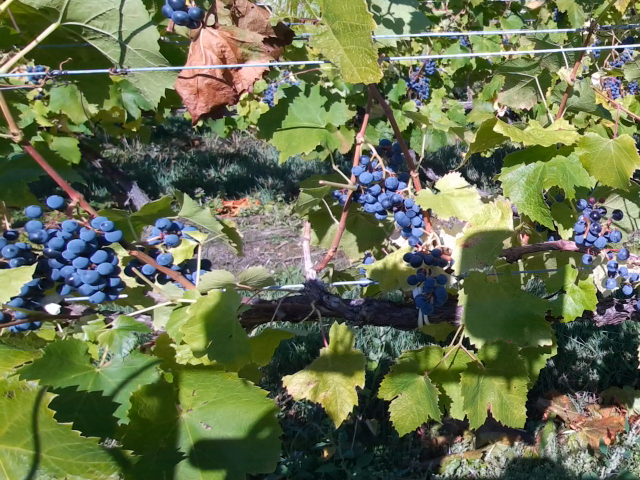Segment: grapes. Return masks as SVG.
Segmentation results:
<instances>
[{"label":"grapes","mask_w":640,"mask_h":480,"mask_svg":"<svg viewBox=\"0 0 640 480\" xmlns=\"http://www.w3.org/2000/svg\"><path fill=\"white\" fill-rule=\"evenodd\" d=\"M149 256L158 260L165 267L181 272L183 274V277L196 284L198 259L184 260L180 262L179 267L178 265L172 264L174 262L173 254L171 252H161V248H150Z\"/></svg>","instance_id":"obj_9"},{"label":"grapes","mask_w":640,"mask_h":480,"mask_svg":"<svg viewBox=\"0 0 640 480\" xmlns=\"http://www.w3.org/2000/svg\"><path fill=\"white\" fill-rule=\"evenodd\" d=\"M162 7L163 16L171 19L177 25L188 28H198L203 19V9L201 7H187L185 0H164Z\"/></svg>","instance_id":"obj_6"},{"label":"grapes","mask_w":640,"mask_h":480,"mask_svg":"<svg viewBox=\"0 0 640 480\" xmlns=\"http://www.w3.org/2000/svg\"><path fill=\"white\" fill-rule=\"evenodd\" d=\"M19 238L17 230H6L0 237V255L7 259L10 267L32 265L36 262V254L29 243L8 244V241H16Z\"/></svg>","instance_id":"obj_5"},{"label":"grapes","mask_w":640,"mask_h":480,"mask_svg":"<svg viewBox=\"0 0 640 480\" xmlns=\"http://www.w3.org/2000/svg\"><path fill=\"white\" fill-rule=\"evenodd\" d=\"M41 326H42L41 320H30L29 322L19 323L18 325H10L7 327V330L12 331L13 333H19L20 331L38 329Z\"/></svg>","instance_id":"obj_11"},{"label":"grapes","mask_w":640,"mask_h":480,"mask_svg":"<svg viewBox=\"0 0 640 480\" xmlns=\"http://www.w3.org/2000/svg\"><path fill=\"white\" fill-rule=\"evenodd\" d=\"M351 174L358 178L360 185H369L371 182H381L384 179V171L378 166L376 160H371L367 155L360 157L358 166L351 168ZM385 188L381 184L369 185L366 192H356L353 195L355 204H364L366 213H375V218L379 221L387 219L388 209L393 212V219L401 228L404 238H408L410 246H418L423 243L425 227L421 206L416 204L412 197L405 198L397 191L404 190L406 183L400 181L397 176H387L385 178Z\"/></svg>","instance_id":"obj_2"},{"label":"grapes","mask_w":640,"mask_h":480,"mask_svg":"<svg viewBox=\"0 0 640 480\" xmlns=\"http://www.w3.org/2000/svg\"><path fill=\"white\" fill-rule=\"evenodd\" d=\"M168 231H198V228L196 226L184 225L183 222H180L179 220L171 221L167 218H157L155 220V226L151 230L150 238H158L162 233H166ZM180 237L190 241H195V238L186 232L166 233L162 238V245L164 247L178 246L180 244Z\"/></svg>","instance_id":"obj_7"},{"label":"grapes","mask_w":640,"mask_h":480,"mask_svg":"<svg viewBox=\"0 0 640 480\" xmlns=\"http://www.w3.org/2000/svg\"><path fill=\"white\" fill-rule=\"evenodd\" d=\"M90 227H80V222L67 219L60 228L47 227L42 220H29L25 230L29 240L41 244L44 258L39 260V271L46 277H36L25 282L18 297L7 302L8 307L24 305V296L30 287L51 291L57 286L59 295L78 293L89 297L91 304L116 302L125 289L119 277L120 267L116 254L109 248L123 238V231L104 215L90 218Z\"/></svg>","instance_id":"obj_1"},{"label":"grapes","mask_w":640,"mask_h":480,"mask_svg":"<svg viewBox=\"0 0 640 480\" xmlns=\"http://www.w3.org/2000/svg\"><path fill=\"white\" fill-rule=\"evenodd\" d=\"M590 203L585 198H580L577 201V207L583 210V214L577 217V221L574 223V241L579 246L592 247L593 245L597 249H604L608 242L618 244L622 238L623 233L620 230L608 231L605 235L598 234L603 230V225L599 220L607 214V209L604 206H593L596 202L594 197L589 198Z\"/></svg>","instance_id":"obj_4"},{"label":"grapes","mask_w":640,"mask_h":480,"mask_svg":"<svg viewBox=\"0 0 640 480\" xmlns=\"http://www.w3.org/2000/svg\"><path fill=\"white\" fill-rule=\"evenodd\" d=\"M132 268L136 269L137 271H140V273L142 275H145V277L148 278L150 282H153V283L157 282L158 284L166 285L170 281L171 283L175 284L179 289L185 290V286L181 285L179 282H176L169 275L163 274L159 270H156V268L151 264L144 265L142 261L138 259H132L128 261L127 267L124 268V274L126 276L136 277L135 282L138 283L139 285H147V281L143 280L141 277H137V274H135Z\"/></svg>","instance_id":"obj_8"},{"label":"grapes","mask_w":640,"mask_h":480,"mask_svg":"<svg viewBox=\"0 0 640 480\" xmlns=\"http://www.w3.org/2000/svg\"><path fill=\"white\" fill-rule=\"evenodd\" d=\"M403 260L409 263L412 268H418L415 275H409L406 278V284L408 286H417L421 282L424 284V286H418L412 291L414 305L421 310V313L430 315L434 311V307L439 308L446 304L449 292L440 285H446L448 277L445 274H438L434 279L425 276V270L419 268L423 263L427 267L446 268L448 260L442 258V251L439 248H434L431 254L427 255L421 251L407 252L403 255Z\"/></svg>","instance_id":"obj_3"},{"label":"grapes","mask_w":640,"mask_h":480,"mask_svg":"<svg viewBox=\"0 0 640 480\" xmlns=\"http://www.w3.org/2000/svg\"><path fill=\"white\" fill-rule=\"evenodd\" d=\"M606 268L610 273H619L621 277H626L627 280H640V275L638 273H628V267H619V263L616 260H609L606 263Z\"/></svg>","instance_id":"obj_10"}]
</instances>
